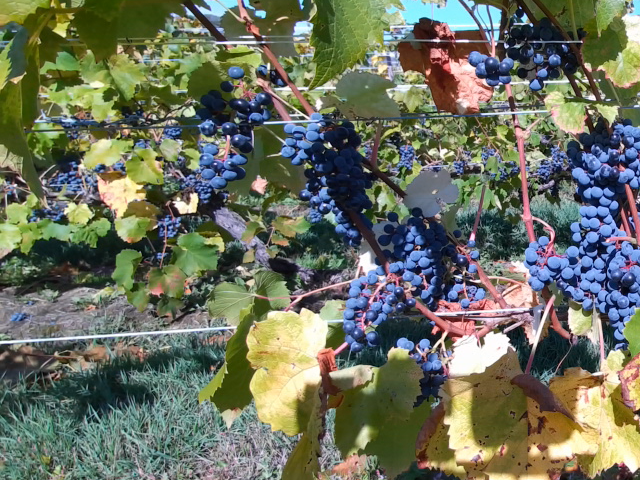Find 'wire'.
<instances>
[{"label": "wire", "mask_w": 640, "mask_h": 480, "mask_svg": "<svg viewBox=\"0 0 640 480\" xmlns=\"http://www.w3.org/2000/svg\"><path fill=\"white\" fill-rule=\"evenodd\" d=\"M237 327L230 324L222 325H206L199 327H183V328H150L133 330L123 333H111V332H85V333H73L63 336H39L33 338L23 339H2L0 346L4 347H19L25 345H35L41 343H65L75 340H87V339H109V340H125L135 337L152 336V335H183V334H201L208 332H235Z\"/></svg>", "instance_id": "d2f4af69"}, {"label": "wire", "mask_w": 640, "mask_h": 480, "mask_svg": "<svg viewBox=\"0 0 640 480\" xmlns=\"http://www.w3.org/2000/svg\"><path fill=\"white\" fill-rule=\"evenodd\" d=\"M198 124H165L159 126L144 125H110L107 127H54L25 129V134L56 133V132H109L112 130H142L161 131L167 129H198Z\"/></svg>", "instance_id": "a73af890"}, {"label": "wire", "mask_w": 640, "mask_h": 480, "mask_svg": "<svg viewBox=\"0 0 640 480\" xmlns=\"http://www.w3.org/2000/svg\"><path fill=\"white\" fill-rule=\"evenodd\" d=\"M552 113L551 109L546 110H495V111H485L479 113H448V112H432V113H423V114H404L399 115V120L406 119H425V118H434V117H446V118H481L487 116H497V115H549Z\"/></svg>", "instance_id": "4f2155b8"}, {"label": "wire", "mask_w": 640, "mask_h": 480, "mask_svg": "<svg viewBox=\"0 0 640 480\" xmlns=\"http://www.w3.org/2000/svg\"><path fill=\"white\" fill-rule=\"evenodd\" d=\"M547 306L545 304H540L532 307L531 305H519L512 306L509 308H501V309H448V310H438L436 315L438 317H450V316H504L511 315L514 313L528 312L532 314H536L542 311H545Z\"/></svg>", "instance_id": "f0478fcc"}, {"label": "wire", "mask_w": 640, "mask_h": 480, "mask_svg": "<svg viewBox=\"0 0 640 480\" xmlns=\"http://www.w3.org/2000/svg\"><path fill=\"white\" fill-rule=\"evenodd\" d=\"M385 43H443V44H462V45H486L491 44V39L483 40H464V39H445V38H385Z\"/></svg>", "instance_id": "a009ed1b"}, {"label": "wire", "mask_w": 640, "mask_h": 480, "mask_svg": "<svg viewBox=\"0 0 640 480\" xmlns=\"http://www.w3.org/2000/svg\"><path fill=\"white\" fill-rule=\"evenodd\" d=\"M310 42L309 38L298 41H265L256 39H226V40H208L204 42L205 46L210 45H228V44H254L263 46H300Z\"/></svg>", "instance_id": "34cfc8c6"}]
</instances>
